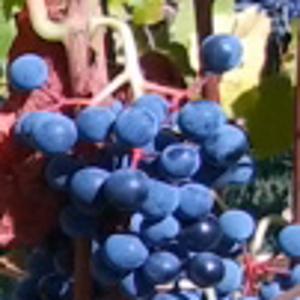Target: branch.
Returning a JSON list of instances; mask_svg holds the SVG:
<instances>
[{"label": "branch", "mask_w": 300, "mask_h": 300, "mask_svg": "<svg viewBox=\"0 0 300 300\" xmlns=\"http://www.w3.org/2000/svg\"><path fill=\"white\" fill-rule=\"evenodd\" d=\"M66 80L73 97L87 99L94 92L90 78L87 47L95 32L90 0H65Z\"/></svg>", "instance_id": "30e6481e"}, {"label": "branch", "mask_w": 300, "mask_h": 300, "mask_svg": "<svg viewBox=\"0 0 300 300\" xmlns=\"http://www.w3.org/2000/svg\"><path fill=\"white\" fill-rule=\"evenodd\" d=\"M295 137L291 153V219L300 225V47L295 49Z\"/></svg>", "instance_id": "325d2c04"}, {"label": "branch", "mask_w": 300, "mask_h": 300, "mask_svg": "<svg viewBox=\"0 0 300 300\" xmlns=\"http://www.w3.org/2000/svg\"><path fill=\"white\" fill-rule=\"evenodd\" d=\"M92 243L86 237L76 239L72 246V261L74 274V295L77 300H90L91 270L90 254Z\"/></svg>", "instance_id": "170604dd"}, {"label": "branch", "mask_w": 300, "mask_h": 300, "mask_svg": "<svg viewBox=\"0 0 300 300\" xmlns=\"http://www.w3.org/2000/svg\"><path fill=\"white\" fill-rule=\"evenodd\" d=\"M196 9V27L197 37L206 39L210 37L213 30V10L216 6V0H195Z\"/></svg>", "instance_id": "45aa463d"}, {"label": "branch", "mask_w": 300, "mask_h": 300, "mask_svg": "<svg viewBox=\"0 0 300 300\" xmlns=\"http://www.w3.org/2000/svg\"><path fill=\"white\" fill-rule=\"evenodd\" d=\"M220 75L201 73V99H215L220 101Z\"/></svg>", "instance_id": "982ccf7c"}]
</instances>
